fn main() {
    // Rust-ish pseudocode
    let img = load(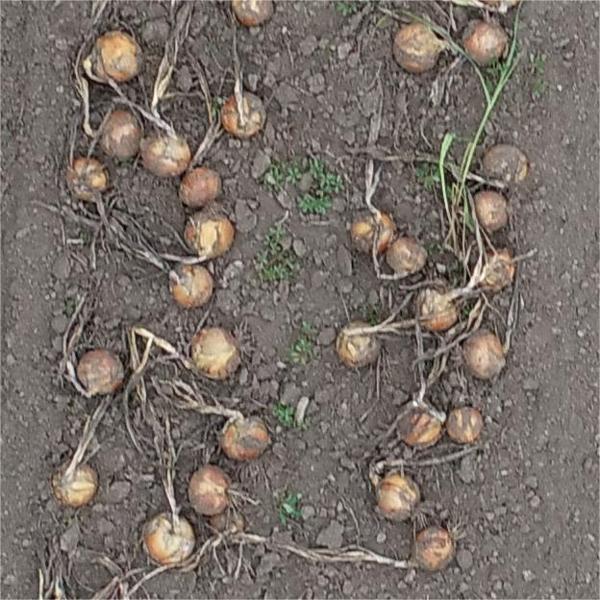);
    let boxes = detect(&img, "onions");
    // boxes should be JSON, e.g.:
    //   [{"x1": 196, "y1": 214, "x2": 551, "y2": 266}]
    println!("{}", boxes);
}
[
  {"x1": 66, "y1": 156, "x2": 106, "y2": 196},
  {"x1": 186, "y1": 214, "x2": 234, "y2": 255},
  {"x1": 394, "y1": 20, "x2": 441, "y2": 72},
  {"x1": 179, "y1": 167, "x2": 218, "y2": 206},
  {"x1": 220, "y1": 92, "x2": 264, "y2": 136},
  {"x1": 75, "y1": 348, "x2": 122, "y2": 395},
  {"x1": 459, "y1": 332, "x2": 503, "y2": 378},
  {"x1": 410, "y1": 527, "x2": 451, "y2": 570},
  {"x1": 190, "y1": 326, "x2": 237, "y2": 376},
  {"x1": 479, "y1": 253, "x2": 512, "y2": 291},
  {"x1": 51, "y1": 461, "x2": 97, "y2": 506},
  {"x1": 142, "y1": 129, "x2": 191, "y2": 175},
  {"x1": 189, "y1": 463, "x2": 230, "y2": 514},
  {"x1": 336, "y1": 322, "x2": 376, "y2": 366},
  {"x1": 143, "y1": 514, "x2": 192, "y2": 561},
  {"x1": 352, "y1": 212, "x2": 393, "y2": 251},
  {"x1": 377, "y1": 474, "x2": 418, "y2": 520},
  {"x1": 222, "y1": 414, "x2": 269, "y2": 459},
  {"x1": 230, "y1": 1, "x2": 273, "y2": 28},
  {"x1": 385, "y1": 235, "x2": 425, "y2": 272},
  {"x1": 96, "y1": 109, "x2": 141, "y2": 157},
  {"x1": 418, "y1": 290, "x2": 456, "y2": 330},
  {"x1": 167, "y1": 262, "x2": 212, "y2": 307},
  {"x1": 462, "y1": 19, "x2": 505, "y2": 62},
  {"x1": 444, "y1": 406, "x2": 482, "y2": 441},
  {"x1": 95, "y1": 31, "x2": 139, "y2": 79},
  {"x1": 472, "y1": 190, "x2": 507, "y2": 228},
  {"x1": 480, "y1": 142, "x2": 527, "y2": 187},
  {"x1": 398, "y1": 407, "x2": 441, "y2": 446}
]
